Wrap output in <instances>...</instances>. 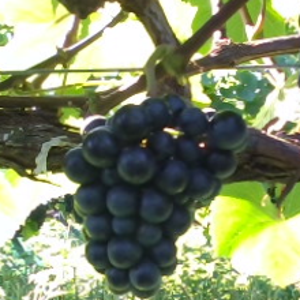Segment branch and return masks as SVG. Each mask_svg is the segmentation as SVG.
Here are the masks:
<instances>
[{
  "mask_svg": "<svg viewBox=\"0 0 300 300\" xmlns=\"http://www.w3.org/2000/svg\"><path fill=\"white\" fill-rule=\"evenodd\" d=\"M119 4L123 8L119 14L98 31L75 44L80 29V17L72 15L62 46L56 49L58 54L26 70H53L55 66L69 61L78 50L114 28L128 12L135 13L148 37L157 47L164 49V53L154 65L155 98L163 99L168 94H174L182 99L187 108L192 107L188 75H195L218 66L239 64L263 55L300 53L299 34L242 42L228 39L225 23L247 4V0H229L225 4L223 0H211V17L182 44L172 32L159 0H119ZM211 35V52L206 56L190 60L209 42Z\"/></svg>",
  "mask_w": 300,
  "mask_h": 300,
  "instance_id": "obj_1",
  "label": "branch"
},
{
  "mask_svg": "<svg viewBox=\"0 0 300 300\" xmlns=\"http://www.w3.org/2000/svg\"><path fill=\"white\" fill-rule=\"evenodd\" d=\"M28 79V75H13L8 81H4L0 84V90L4 91L7 88L12 87L16 82H23Z\"/></svg>",
  "mask_w": 300,
  "mask_h": 300,
  "instance_id": "obj_3",
  "label": "branch"
},
{
  "mask_svg": "<svg viewBox=\"0 0 300 300\" xmlns=\"http://www.w3.org/2000/svg\"><path fill=\"white\" fill-rule=\"evenodd\" d=\"M147 90V76L140 74L130 85L121 90L96 92L81 97H12L1 96L0 107L24 106H88L96 115H106L127 98Z\"/></svg>",
  "mask_w": 300,
  "mask_h": 300,
  "instance_id": "obj_2",
  "label": "branch"
},
{
  "mask_svg": "<svg viewBox=\"0 0 300 300\" xmlns=\"http://www.w3.org/2000/svg\"><path fill=\"white\" fill-rule=\"evenodd\" d=\"M49 74H50V73H41V74L39 75V77L36 78V79L34 80V82L31 84V88H32L33 90H36V89L40 86V84H42V83L45 81L46 77H48Z\"/></svg>",
  "mask_w": 300,
  "mask_h": 300,
  "instance_id": "obj_4",
  "label": "branch"
}]
</instances>
